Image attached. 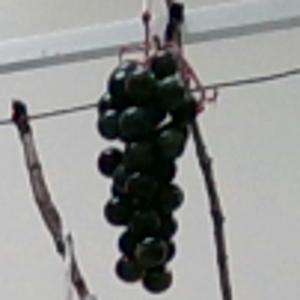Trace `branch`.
Masks as SVG:
<instances>
[{
  "instance_id": "170604dd",
  "label": "branch",
  "mask_w": 300,
  "mask_h": 300,
  "mask_svg": "<svg viewBox=\"0 0 300 300\" xmlns=\"http://www.w3.org/2000/svg\"><path fill=\"white\" fill-rule=\"evenodd\" d=\"M166 8V24L161 36V47H172L180 51L182 49V26L185 23V4L177 0H164Z\"/></svg>"
},
{
  "instance_id": "30e6481e",
  "label": "branch",
  "mask_w": 300,
  "mask_h": 300,
  "mask_svg": "<svg viewBox=\"0 0 300 300\" xmlns=\"http://www.w3.org/2000/svg\"><path fill=\"white\" fill-rule=\"evenodd\" d=\"M11 112V122L17 128V137L23 150L27 187L40 218L54 242L55 251L58 252L70 276L69 282L74 287L78 300H98L97 296L87 288L86 279L75 259L72 231H68L64 226L62 216L51 199L34 143V129L28 122L27 105L22 99L11 98Z\"/></svg>"
},
{
  "instance_id": "325d2c04",
  "label": "branch",
  "mask_w": 300,
  "mask_h": 300,
  "mask_svg": "<svg viewBox=\"0 0 300 300\" xmlns=\"http://www.w3.org/2000/svg\"><path fill=\"white\" fill-rule=\"evenodd\" d=\"M194 143V153L201 176V183L206 197L207 215L213 237V245L218 272V285L222 300L232 299V284L228 264V247L225 240L224 225L227 216L223 214L220 204V195L217 191L215 173L213 168L214 158L208 153V146L200 133L198 116L196 123L188 129Z\"/></svg>"
}]
</instances>
